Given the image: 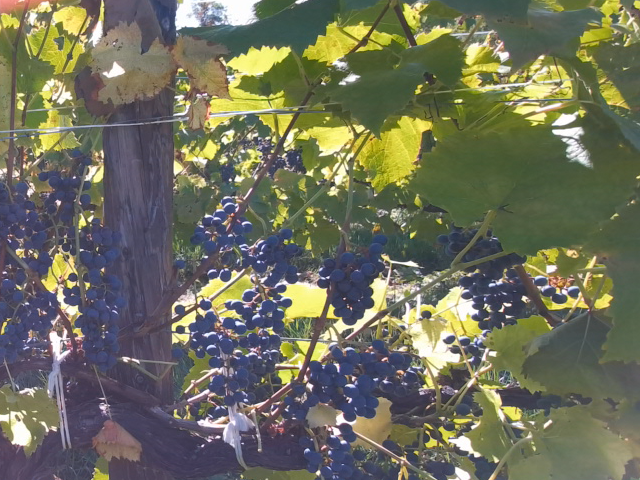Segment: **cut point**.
Masks as SVG:
<instances>
[{
    "label": "cut point",
    "instance_id": "1",
    "mask_svg": "<svg viewBox=\"0 0 640 480\" xmlns=\"http://www.w3.org/2000/svg\"><path fill=\"white\" fill-rule=\"evenodd\" d=\"M245 209L256 218V220L262 225L263 229L267 228L266 221L249 204L245 207Z\"/></svg>",
    "mask_w": 640,
    "mask_h": 480
},
{
    "label": "cut point",
    "instance_id": "2",
    "mask_svg": "<svg viewBox=\"0 0 640 480\" xmlns=\"http://www.w3.org/2000/svg\"><path fill=\"white\" fill-rule=\"evenodd\" d=\"M325 328H331V329H333L334 334H335V338H337V339L339 340V342H341V341H342V337H341V335H340V331H339L338 326H337L336 324H334V323H327V322H325Z\"/></svg>",
    "mask_w": 640,
    "mask_h": 480
}]
</instances>
